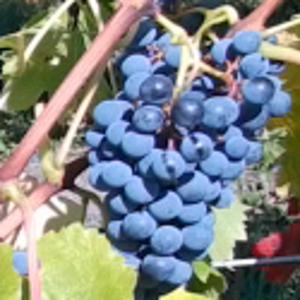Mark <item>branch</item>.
Returning a JSON list of instances; mask_svg holds the SVG:
<instances>
[{"label": "branch", "instance_id": "branch-1", "mask_svg": "<svg viewBox=\"0 0 300 300\" xmlns=\"http://www.w3.org/2000/svg\"><path fill=\"white\" fill-rule=\"evenodd\" d=\"M154 0H124L107 26L96 37L68 76L61 82L34 128L25 136L0 176V202L8 199L14 178L35 146L63 116L81 84L107 59L121 43L128 30L135 26L153 6Z\"/></svg>", "mask_w": 300, "mask_h": 300}, {"label": "branch", "instance_id": "branch-2", "mask_svg": "<svg viewBox=\"0 0 300 300\" xmlns=\"http://www.w3.org/2000/svg\"><path fill=\"white\" fill-rule=\"evenodd\" d=\"M89 166L85 157H78L65 166L57 175L44 186L34 192L12 214L0 223V238L6 239L28 221L43 205L51 200L65 186L75 181Z\"/></svg>", "mask_w": 300, "mask_h": 300}, {"label": "branch", "instance_id": "branch-3", "mask_svg": "<svg viewBox=\"0 0 300 300\" xmlns=\"http://www.w3.org/2000/svg\"><path fill=\"white\" fill-rule=\"evenodd\" d=\"M279 7L277 1H266L262 3L251 14L236 22L227 32L228 39H234L245 29H257L259 31H268L270 29L267 20H269L273 12Z\"/></svg>", "mask_w": 300, "mask_h": 300}]
</instances>
